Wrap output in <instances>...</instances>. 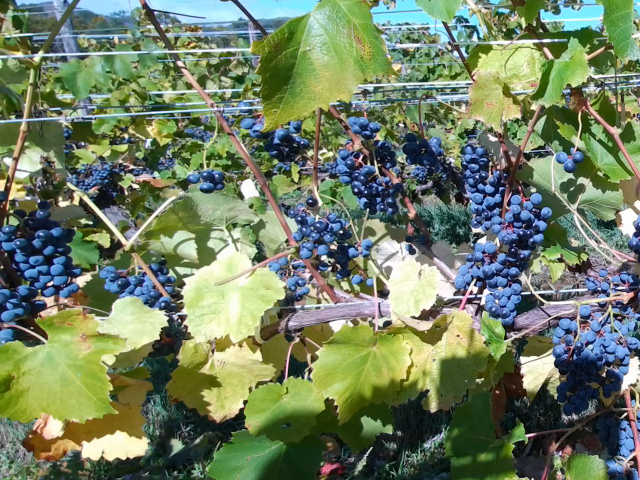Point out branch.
<instances>
[{"instance_id":"16","label":"branch","mask_w":640,"mask_h":480,"mask_svg":"<svg viewBox=\"0 0 640 480\" xmlns=\"http://www.w3.org/2000/svg\"><path fill=\"white\" fill-rule=\"evenodd\" d=\"M612 49H613V45L611 43L600 45L596 50H594L590 54L586 55L584 57V60L586 62H591L592 60H594L596 57H598L603 52L611 51Z\"/></svg>"},{"instance_id":"8","label":"branch","mask_w":640,"mask_h":480,"mask_svg":"<svg viewBox=\"0 0 640 480\" xmlns=\"http://www.w3.org/2000/svg\"><path fill=\"white\" fill-rule=\"evenodd\" d=\"M80 2H81V0H72V2L70 3L68 9L64 13L62 19L60 20V23H58L53 28V30L50 32V35L48 36V38L44 42V44L39 48V52L41 54L45 53L50 48L51 44L54 42V40L57 37V35L67 25L70 17L72 16L73 12L76 10V7Z\"/></svg>"},{"instance_id":"14","label":"branch","mask_w":640,"mask_h":480,"mask_svg":"<svg viewBox=\"0 0 640 480\" xmlns=\"http://www.w3.org/2000/svg\"><path fill=\"white\" fill-rule=\"evenodd\" d=\"M624 395L626 396L627 406H628L629 412H630V425H631V427L633 429V434L635 435V441H636L635 448L639 452V455L636 457V463L638 465H640V433H639L638 427H637V425L635 423L634 405L632 404L631 394L628 391H625Z\"/></svg>"},{"instance_id":"7","label":"branch","mask_w":640,"mask_h":480,"mask_svg":"<svg viewBox=\"0 0 640 480\" xmlns=\"http://www.w3.org/2000/svg\"><path fill=\"white\" fill-rule=\"evenodd\" d=\"M171 59L173 61H176V64H177L178 68L187 75V77L189 78V80L191 81L193 86L203 96V98L205 99V101L209 105V107L210 108H215L216 107V103L213 101V98L207 92V90L203 87V85L198 81V79L196 78L195 74L191 71V69L189 68L188 64L186 63L185 59L181 55H178V54H173L171 56Z\"/></svg>"},{"instance_id":"4","label":"branch","mask_w":640,"mask_h":480,"mask_svg":"<svg viewBox=\"0 0 640 480\" xmlns=\"http://www.w3.org/2000/svg\"><path fill=\"white\" fill-rule=\"evenodd\" d=\"M27 131H28V124L26 122L22 123L18 139L15 142L12 149L11 163H10L9 170L7 172L4 189L0 199V226H2L5 221L6 204L12 188L13 178L17 169L18 161H19V151L21 146L25 142Z\"/></svg>"},{"instance_id":"15","label":"branch","mask_w":640,"mask_h":480,"mask_svg":"<svg viewBox=\"0 0 640 480\" xmlns=\"http://www.w3.org/2000/svg\"><path fill=\"white\" fill-rule=\"evenodd\" d=\"M233 3L242 10L244 15L259 33H261L264 37H267L269 35V32L260 25L256 17L251 13L250 9L242 0H233Z\"/></svg>"},{"instance_id":"3","label":"branch","mask_w":640,"mask_h":480,"mask_svg":"<svg viewBox=\"0 0 640 480\" xmlns=\"http://www.w3.org/2000/svg\"><path fill=\"white\" fill-rule=\"evenodd\" d=\"M542 108H543V105L539 104L537 106V108L535 109V112L532 115V118H531V121H530L529 128H528V130H527V132H526V134H525V136H524V138H523V140H522V142L520 144L518 155H517L514 163H513L512 159H511V156H510V153L508 151V147L506 145L505 138H504L503 134L502 133H498L497 134V137L500 140V145H501V147L503 149V153H504V156L506 158L507 164L511 168L510 169V175L508 176L507 183H506V192H505L504 201H503L502 220H505V214H506V212L508 210L509 198H510V194H511V183H512L513 177H514V175H515V173L517 171L518 164L521 162L525 146L527 145V142L529 141V139H530V137H531V135L533 133V130H534V127H535V123L537 121V118H538Z\"/></svg>"},{"instance_id":"6","label":"branch","mask_w":640,"mask_h":480,"mask_svg":"<svg viewBox=\"0 0 640 480\" xmlns=\"http://www.w3.org/2000/svg\"><path fill=\"white\" fill-rule=\"evenodd\" d=\"M323 117V108L318 106L316 108V115L313 120V128H314V147L312 149V156L310 160V176L312 180V185L317 187L319 185V178L317 174V163L319 158V152L321 149V119Z\"/></svg>"},{"instance_id":"13","label":"branch","mask_w":640,"mask_h":480,"mask_svg":"<svg viewBox=\"0 0 640 480\" xmlns=\"http://www.w3.org/2000/svg\"><path fill=\"white\" fill-rule=\"evenodd\" d=\"M398 195L402 198V201L408 210V212L414 217V220L417 222V225L421 229L422 236L427 238L429 236V231L427 225L424 223L423 218L419 214V212L412 205L411 200L409 199L408 193L405 190H400Z\"/></svg>"},{"instance_id":"1","label":"branch","mask_w":640,"mask_h":480,"mask_svg":"<svg viewBox=\"0 0 640 480\" xmlns=\"http://www.w3.org/2000/svg\"><path fill=\"white\" fill-rule=\"evenodd\" d=\"M214 116L219 121V124L223 128L225 134L235 143L239 154L241 155L243 160L248 165L249 170L252 173V175L254 176V178L256 179L258 185L262 188V191H263V193H264V195H265V197L267 199L268 204L274 210V212H275L277 218L279 219V222H280V224H281V226L283 228V231L286 234L287 242L292 247H296L298 245V242L293 237V231L291 230V228H290V226H289V224L287 222V219H286V217L284 216V214L282 212V209L280 208L278 203L274 200V197H273V195H272V193H271V191H270V189L268 187V184L264 181L263 176L257 170L256 164L253 162L251 157L248 155L246 149L244 148V145H243L242 141L231 130L229 124L226 122V118L223 116V114L221 112L214 113Z\"/></svg>"},{"instance_id":"5","label":"branch","mask_w":640,"mask_h":480,"mask_svg":"<svg viewBox=\"0 0 640 480\" xmlns=\"http://www.w3.org/2000/svg\"><path fill=\"white\" fill-rule=\"evenodd\" d=\"M581 104L587 112H589L597 121H599L600 126L602 128H604L608 133L614 136L622 152V155L625 157L627 163L629 164V167L634 172L636 178L640 180V168L637 166L632 155L629 153V150L621 136V133L617 131L614 127L610 126L609 121L605 119L599 112L596 111L594 107L590 105V103L588 102V96L586 94H583L581 96Z\"/></svg>"},{"instance_id":"11","label":"branch","mask_w":640,"mask_h":480,"mask_svg":"<svg viewBox=\"0 0 640 480\" xmlns=\"http://www.w3.org/2000/svg\"><path fill=\"white\" fill-rule=\"evenodd\" d=\"M140 4L142 5L144 12L146 14V16L148 17V20L150 21V23L152 24V26L155 28V30L157 31V33L162 37V39L164 40L165 45L167 46V48L170 49H174L175 45L173 44L170 36L166 33V31L162 28V26L159 24L158 20L156 19L155 15L153 14L151 7L148 3L147 0H141Z\"/></svg>"},{"instance_id":"12","label":"branch","mask_w":640,"mask_h":480,"mask_svg":"<svg viewBox=\"0 0 640 480\" xmlns=\"http://www.w3.org/2000/svg\"><path fill=\"white\" fill-rule=\"evenodd\" d=\"M303 263L311 277L325 288L335 304H339L341 302L340 297L337 295L334 288L324 278H322L319 273H317L311 261L308 258H305Z\"/></svg>"},{"instance_id":"17","label":"branch","mask_w":640,"mask_h":480,"mask_svg":"<svg viewBox=\"0 0 640 480\" xmlns=\"http://www.w3.org/2000/svg\"><path fill=\"white\" fill-rule=\"evenodd\" d=\"M455 50L457 51V53L459 54V56L461 57V59L463 60V63L465 64L466 68L468 71H472L473 67L471 66L468 58L466 57V54L464 53V51L462 50V48L460 46H456Z\"/></svg>"},{"instance_id":"2","label":"branch","mask_w":640,"mask_h":480,"mask_svg":"<svg viewBox=\"0 0 640 480\" xmlns=\"http://www.w3.org/2000/svg\"><path fill=\"white\" fill-rule=\"evenodd\" d=\"M64 183L74 194L78 195L79 197H81L83 201L86 202V204L89 206V208L97 218H99L103 223H105L110 228V230L119 240L120 244L124 248H126L128 251L131 252L138 268L148 276V278L153 283V285L158 289V291L164 297H167L169 295V292L166 290L164 285L158 280V278L153 273V271L143 263L141 255L137 250V248L126 240L125 236L120 232L117 225L111 219H109L102 211H100L97 205L95 204V202L93 201V199L89 195H87L83 190L78 188L69 178H66L64 180Z\"/></svg>"},{"instance_id":"10","label":"branch","mask_w":640,"mask_h":480,"mask_svg":"<svg viewBox=\"0 0 640 480\" xmlns=\"http://www.w3.org/2000/svg\"><path fill=\"white\" fill-rule=\"evenodd\" d=\"M40 63H41V59L33 60L31 63V67L29 69L30 80L28 85L27 98L24 105L23 117L31 116V108H32V103L34 101V93H35V87L37 82V69Z\"/></svg>"},{"instance_id":"9","label":"branch","mask_w":640,"mask_h":480,"mask_svg":"<svg viewBox=\"0 0 640 480\" xmlns=\"http://www.w3.org/2000/svg\"><path fill=\"white\" fill-rule=\"evenodd\" d=\"M329 112L330 114L337 119L341 126L342 129L345 131L348 139L351 141V143L364 155H366L367 157H370L372 155V151L370 149H368L367 147H364L363 144L358 141V139L355 137L352 129L350 128L347 120L336 110V106H328Z\"/></svg>"},{"instance_id":"18","label":"branch","mask_w":640,"mask_h":480,"mask_svg":"<svg viewBox=\"0 0 640 480\" xmlns=\"http://www.w3.org/2000/svg\"><path fill=\"white\" fill-rule=\"evenodd\" d=\"M442 25H443L444 29L446 30V33L449 35V37L452 40L458 41L457 36L452 32L451 28L448 25V22L447 21H443Z\"/></svg>"}]
</instances>
